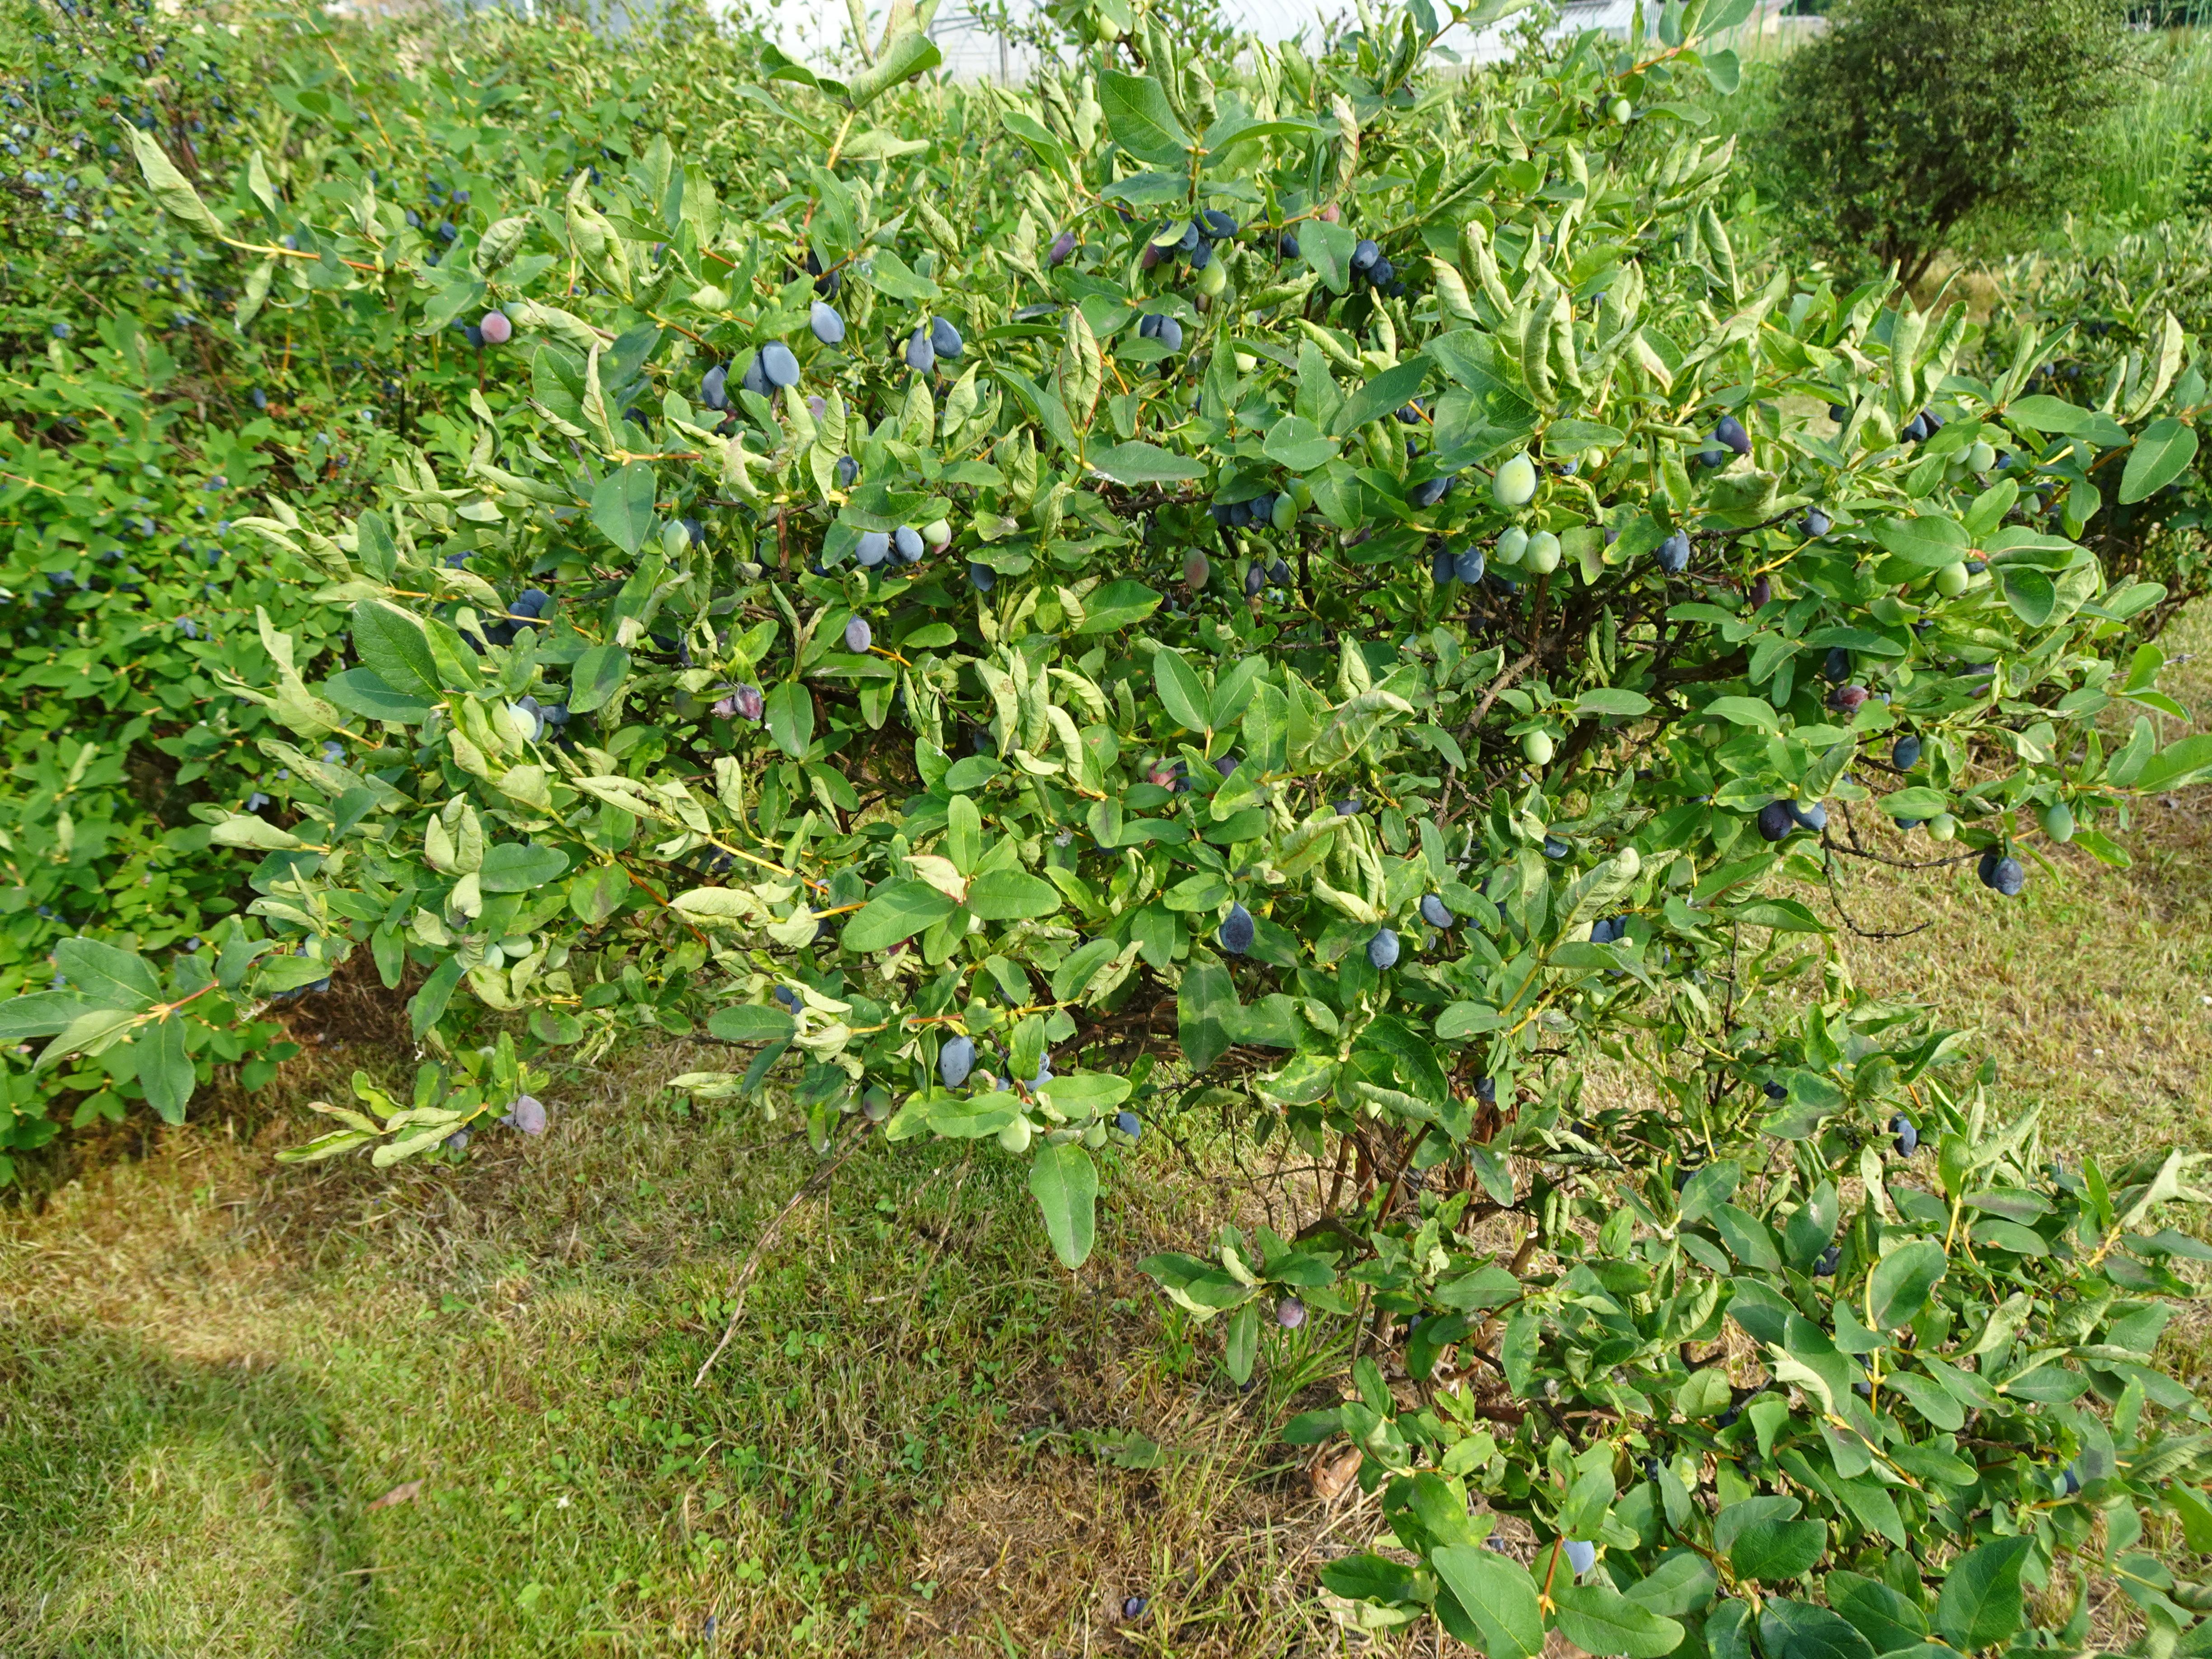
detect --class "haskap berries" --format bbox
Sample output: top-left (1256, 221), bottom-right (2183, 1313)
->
top-left (853, 524), bottom-right (890, 567)
top-left (1138, 747), bottom-right (1162, 777)
top-left (2065, 1464), bottom-right (2081, 1493)
top-left (1911, 610), bottom-right (1934, 627)
top-left (870, 560), bottom-right (886, 573)
top-left (1426, 933), bottom-right (1436, 951)
top-left (1564, 413), bottom-right (1572, 419)
top-left (1158, 245), bottom-right (1174, 263)
top-left (1925, 405), bottom-right (1946, 427)
top-left (272, 990), bottom-right (286, 1001)
top-left (1998, 455), bottom-right (2013, 470)
top-left (809, 395), bottom-right (827, 420)
top-left (1196, 210), bottom-right (1237, 240)
top-left (1634, 770), bottom-right (1655, 779)
top-left (997, 985), bottom-right (1015, 1003)
top-left (1496, 902), bottom-right (1508, 918)
top-left (1159, 220), bottom-right (1173, 235)
top-left (1874, 693), bottom-right (1890, 706)
top-left (742, 353), bottom-right (776, 398)
top-left (775, 984), bottom-right (794, 1006)
top-left (1826, 688), bottom-right (1847, 715)
top-left (968, 562), bottom-right (997, 593)
top-left (717, 630), bottom-right (729, 646)
top-left (1907, 415), bottom-right (1928, 441)
top-left (1390, 282), bottom-right (1407, 301)
top-left (815, 564), bottom-right (831, 578)
top-left (481, 943), bottom-right (505, 971)
top-left (974, 730), bottom-right (994, 751)
top-left (759, 537), bottom-right (781, 568)
top-left (1037, 1052), bottom-right (1049, 1072)
top-left (1286, 477), bottom-right (1313, 511)
top-left (454, 1132), bottom-right (468, 1147)
top-left (679, 643), bottom-right (696, 669)
top-left (808, 906), bottom-right (829, 942)
top-left (2045, 1467), bottom-right (2067, 1502)
top-left (1823, 648), bottom-right (1852, 683)
top-left (929, 315), bottom-right (964, 357)
top-left (734, 681), bottom-right (766, 725)
top-left (1048, 230), bottom-right (1079, 263)
top-left (701, 364), bottom-right (730, 409)
top-left (1926, 813), bottom-right (1957, 843)
top-left (791, 995), bottom-right (803, 1017)
top-left (1699, 431), bottom-right (1723, 468)
top-left (1115, 1111), bottom-right (1142, 1140)
top-left (1406, 440), bottom-right (1417, 458)
top-left (1481, 877), bottom-right (1493, 895)
top-left (1590, 917), bottom-right (1614, 943)
top-left (1604, 526), bottom-right (1620, 545)
top-left (473, 622), bottom-right (494, 651)
top-left (1965, 562), bottom-right (1986, 574)
top-left (1239, 558), bottom-right (1265, 597)
top-left (1821, 744), bottom-right (1837, 757)
top-left (1024, 1071), bottom-right (1055, 1093)
top-left (1841, 773), bottom-right (1852, 786)
top-left (1213, 754), bottom-right (1241, 776)
top-left (1158, 314), bottom-right (1183, 350)
top-left (837, 455), bottom-right (859, 487)
top-left (662, 520), bottom-right (691, 562)
top-left (1143, 513), bottom-right (1159, 548)
top-left (1157, 592), bottom-right (1171, 612)
top-left (1890, 732), bottom-right (1921, 774)
top-left (501, 1100), bottom-right (517, 1127)
top-left (941, 379), bottom-right (955, 396)
top-left (1714, 1406), bottom-right (1738, 1427)
top-left (1474, 1075), bottom-right (1492, 1092)
top-left (1963, 663), bottom-right (1996, 697)
top-left (497, 932), bottom-right (533, 959)
top-left (1678, 1169), bottom-right (1700, 1194)
top-left (1547, 458), bottom-right (1577, 476)
top-left (887, 939), bottom-right (908, 957)
top-left (1248, 486), bottom-right (1274, 522)
top-left (1219, 902), bottom-right (1257, 952)
top-left (1414, 474), bottom-right (1447, 508)
top-left (1495, 524), bottom-right (1529, 568)
top-left (922, 519), bottom-right (953, 553)
top-left (1749, 577), bottom-right (1772, 609)
top-left (761, 341), bottom-right (801, 390)
top-left (1467, 602), bottom-right (1486, 631)
top-left (1230, 490), bottom-right (1252, 529)
top-left (1613, 915), bottom-right (1629, 941)
top-left (1424, 450), bottom-right (1441, 456)
top-left (1828, 401), bottom-right (1849, 424)
top-left (1277, 593), bottom-right (1284, 602)
top-left (1542, 834), bottom-right (1568, 858)
top-left (1149, 760), bottom-right (1178, 793)
top-left (1432, 544), bottom-right (1457, 584)
top-left (1889, 1111), bottom-right (1906, 1132)
top-left (1497, 225), bottom-right (1521, 234)
top-left (995, 1075), bottom-right (1011, 1093)
top-left (1591, 292), bottom-right (1607, 308)
top-left (1368, 258), bottom-right (1395, 288)
top-left (884, 547), bottom-right (899, 566)
top-left (1764, 1080), bottom-right (1788, 1098)
top-left (1118, 201), bottom-right (1134, 223)
top-left (1352, 240), bottom-right (1380, 273)
top-left (1412, 1314), bottom-right (1423, 1327)
top-left (682, 515), bottom-right (706, 549)
top-left (1800, 506), bottom-right (1832, 538)
top-left (895, 525), bottom-right (924, 565)
top-left (479, 311), bottom-right (512, 346)
top-left (295, 947), bottom-right (330, 991)
top-left (1278, 1296), bottom-right (1305, 1328)
top-left (843, 402), bottom-right (850, 416)
top-left (1565, 1540), bottom-right (1593, 1573)
top-left (1176, 218), bottom-right (1197, 249)
top-left (1992, 856), bottom-right (2025, 897)
top-left (518, 695), bottom-right (544, 741)
top-left (1900, 426), bottom-right (1913, 444)
top-left (1587, 446), bottom-right (1603, 467)
top-left (1139, 314), bottom-right (1164, 342)
top-left (1187, 226), bottom-right (1213, 269)
top-left (709, 504), bottom-right (716, 511)
top-left (507, 700), bottom-right (540, 739)
top-left (287, 985), bottom-right (303, 999)
top-left (934, 384), bottom-right (943, 400)
top-left (906, 334), bottom-right (934, 374)
top-left (515, 1094), bottom-right (547, 1136)
top-left (861, 1088), bottom-right (892, 1123)
top-left (1540, 234), bottom-right (1549, 243)
top-left (1267, 558), bottom-right (1291, 588)
top-left (1347, 527), bottom-right (1372, 550)
top-left (1368, 924), bottom-right (1399, 970)
top-left (649, 632), bottom-right (679, 652)
top-left (1479, 1078), bottom-right (1496, 1101)
top-left (1968, 441), bottom-right (1995, 473)
top-left (536, 698), bottom-right (574, 725)
top-left (2044, 804), bottom-right (2078, 844)
top-left (1211, 500), bottom-right (1230, 527)
top-left (2010, 502), bottom-right (2022, 514)
top-left (1466, 917), bottom-right (1482, 929)
top-left (1795, 801), bottom-right (1828, 832)
top-left (2021, 492), bottom-right (2041, 513)
top-left (1662, 946), bottom-right (1670, 970)
top-left (1142, 243), bottom-right (1159, 268)
top-left (624, 404), bottom-right (648, 434)
top-left (808, 248), bottom-right (841, 298)
top-left (520, 588), bottom-right (561, 617)
top-left (1894, 817), bottom-right (1921, 830)
top-left (787, 539), bottom-right (806, 573)
top-left (1858, 1381), bottom-right (1872, 1393)
top-left (1257, 357), bottom-right (1268, 365)
top-left (2036, 483), bottom-right (2062, 512)
top-left (1398, 396), bottom-right (1424, 423)
top-left (1246, 593), bottom-right (1263, 615)
top-left (998, 1113), bottom-right (1032, 1155)
top-left (1757, 797), bottom-right (1792, 842)
top-left (1528, 530), bottom-right (1562, 578)
top-left (1196, 395), bottom-right (1203, 413)
top-left (1894, 1117), bottom-right (1917, 1156)
top-left (808, 301), bottom-right (846, 346)
top-left (1442, 476), bottom-right (1458, 497)
top-left (1937, 560), bottom-right (1969, 600)
top-left (1400, 633), bottom-right (1423, 662)
top-left (844, 616), bottom-right (870, 653)
top-left (476, 1044), bottom-right (497, 1057)
top-left (458, 627), bottom-right (476, 648)
top-left (676, 691), bottom-right (707, 720)
top-left (1493, 573), bottom-right (1515, 595)
top-left (1493, 450), bottom-right (1536, 512)
top-left (715, 683), bottom-right (734, 720)
top-left (1606, 968), bottom-right (1625, 977)
top-left (1278, 232), bottom-right (1301, 259)
top-left (1174, 785), bottom-right (1186, 793)
top-left (1175, 762), bottom-right (1187, 771)
top-left (1672, 1168), bottom-right (1683, 1192)
top-left (1522, 726), bottom-right (1553, 767)
top-left (1271, 493), bottom-right (1297, 534)
top-left (1642, 1453), bottom-right (1667, 1480)
top-left (1453, 545), bottom-right (1484, 587)
top-left (1331, 786), bottom-right (1364, 816)
top-left (1198, 263), bottom-right (1226, 299)
top-left (1815, 1247), bottom-right (1840, 1278)
top-left (1856, 1354), bottom-right (1869, 1367)
top-left (1687, 794), bottom-right (1712, 804)
top-left (493, 619), bottom-right (516, 645)
top-left (1419, 892), bottom-right (1454, 929)
top-left (445, 551), bottom-right (470, 570)
top-left (1176, 769), bottom-right (1193, 792)
top-left (940, 1031), bottom-right (977, 1089)
top-left (1656, 529), bottom-right (1694, 577)
top-left (509, 604), bottom-right (537, 635)
top-left (1235, 350), bottom-right (1257, 374)
top-left (555, 560), bottom-right (583, 581)
top-left (1718, 415), bottom-right (1752, 454)
top-left (1181, 544), bottom-right (1211, 590)
top-left (1269, 590), bottom-right (1275, 599)
top-left (1838, 685), bottom-right (1869, 713)
top-left (502, 458), bottom-right (511, 470)
top-left (1174, 377), bottom-right (1198, 405)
